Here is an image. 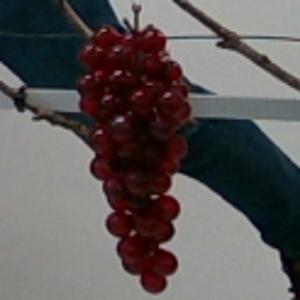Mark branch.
Returning a JSON list of instances; mask_svg holds the SVG:
<instances>
[{"instance_id":"30e6481e","label":"branch","mask_w":300,"mask_h":300,"mask_svg":"<svg viewBox=\"0 0 300 300\" xmlns=\"http://www.w3.org/2000/svg\"><path fill=\"white\" fill-rule=\"evenodd\" d=\"M180 11L197 21L210 32L215 34L219 40L213 42V47L226 52H233L249 60L277 82L288 86L300 95V77L287 71L274 62L268 54L261 53L250 44L242 40L239 34L231 28L224 26L214 20L207 12L195 5L191 0H170Z\"/></svg>"},{"instance_id":"325d2c04","label":"branch","mask_w":300,"mask_h":300,"mask_svg":"<svg viewBox=\"0 0 300 300\" xmlns=\"http://www.w3.org/2000/svg\"><path fill=\"white\" fill-rule=\"evenodd\" d=\"M0 94L13 104V108L18 114H24L27 111L33 114L30 119L31 122H47L51 126L64 127L86 135L87 126L85 124L54 114L37 104L30 98L25 85L13 88L0 78Z\"/></svg>"},{"instance_id":"170604dd","label":"branch","mask_w":300,"mask_h":300,"mask_svg":"<svg viewBox=\"0 0 300 300\" xmlns=\"http://www.w3.org/2000/svg\"><path fill=\"white\" fill-rule=\"evenodd\" d=\"M69 21L71 26L89 43L94 42L96 32L79 17L74 7L66 0H50Z\"/></svg>"}]
</instances>
